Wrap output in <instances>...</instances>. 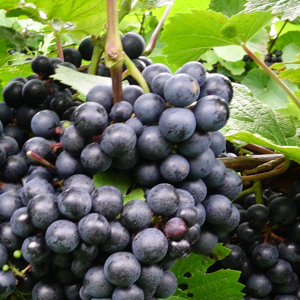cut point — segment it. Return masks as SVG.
<instances>
[{"mask_svg":"<svg viewBox=\"0 0 300 300\" xmlns=\"http://www.w3.org/2000/svg\"><path fill=\"white\" fill-rule=\"evenodd\" d=\"M123 62L124 65L127 67L128 71L132 75V77L136 80L139 84V87L146 93L150 92L149 86L145 78L142 76L141 71L134 65L131 61L130 57L123 51Z\"/></svg>","mask_w":300,"mask_h":300,"instance_id":"cut-point-1","label":"cut point"}]
</instances>
